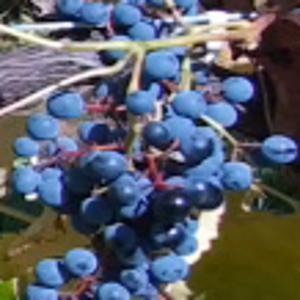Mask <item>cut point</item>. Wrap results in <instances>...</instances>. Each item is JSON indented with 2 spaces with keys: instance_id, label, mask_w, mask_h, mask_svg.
Wrapping results in <instances>:
<instances>
[{
  "instance_id": "obj_1",
  "label": "cut point",
  "mask_w": 300,
  "mask_h": 300,
  "mask_svg": "<svg viewBox=\"0 0 300 300\" xmlns=\"http://www.w3.org/2000/svg\"><path fill=\"white\" fill-rule=\"evenodd\" d=\"M229 27H245L249 29L251 27V22L249 20H227L219 23H211V24H199L193 26L189 32L185 34L187 39L194 37L196 33L201 31H214V30H222Z\"/></svg>"
},
{
  "instance_id": "obj_2",
  "label": "cut point",
  "mask_w": 300,
  "mask_h": 300,
  "mask_svg": "<svg viewBox=\"0 0 300 300\" xmlns=\"http://www.w3.org/2000/svg\"><path fill=\"white\" fill-rule=\"evenodd\" d=\"M146 52L147 51L136 52L134 66L132 69L131 80H130L129 86H127L125 88V91L127 93L137 92L141 87L142 72H143V65H144V59H145Z\"/></svg>"
},
{
  "instance_id": "obj_3",
  "label": "cut point",
  "mask_w": 300,
  "mask_h": 300,
  "mask_svg": "<svg viewBox=\"0 0 300 300\" xmlns=\"http://www.w3.org/2000/svg\"><path fill=\"white\" fill-rule=\"evenodd\" d=\"M193 50V46L188 44L184 50V64H183V75L184 80H188L192 83V77L190 72V67L192 65L191 53Z\"/></svg>"
}]
</instances>
